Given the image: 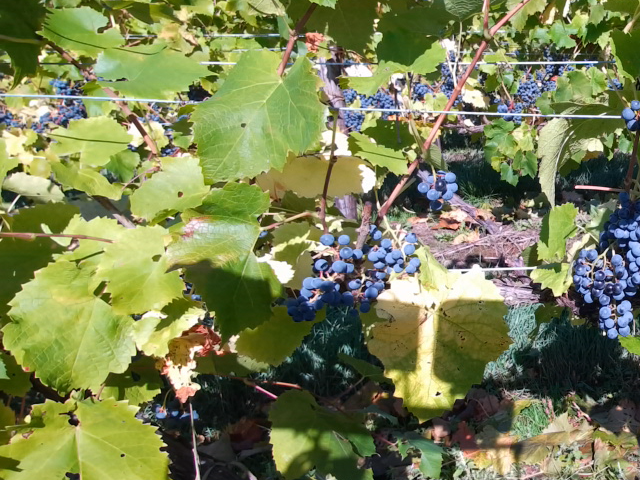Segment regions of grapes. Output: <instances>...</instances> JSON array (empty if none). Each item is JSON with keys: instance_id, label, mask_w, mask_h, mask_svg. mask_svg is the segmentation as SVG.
<instances>
[{"instance_id": "obj_1", "label": "grapes", "mask_w": 640, "mask_h": 480, "mask_svg": "<svg viewBox=\"0 0 640 480\" xmlns=\"http://www.w3.org/2000/svg\"><path fill=\"white\" fill-rule=\"evenodd\" d=\"M620 208L610 215V220L604 224V231L599 234V246L606 249L609 238H616L619 247L631 249L626 258L631 261L629 269L623 267V257L615 254L611 258L614 271L610 267L598 270L592 279L588 276L591 265L598 258L595 249L582 250L575 260V274L572 276L575 290L584 296L587 304L602 305L599 308V327L607 330L611 339L619 335L626 336L630 332L633 314L630 312L632 303L624 300L626 296H633L636 288H640V201L631 203L626 191L618 194Z\"/></svg>"}, {"instance_id": "obj_2", "label": "grapes", "mask_w": 640, "mask_h": 480, "mask_svg": "<svg viewBox=\"0 0 640 480\" xmlns=\"http://www.w3.org/2000/svg\"><path fill=\"white\" fill-rule=\"evenodd\" d=\"M369 235L372 236L374 242H380V249L373 248L372 245L365 244L362 249H354L352 247H343L339 251L342 259L360 260L367 257L368 262L378 269L372 272V279L365 281L364 295L360 297V305L358 310L361 313H369L371 311V303L376 302L381 291L384 290L385 279L392 272L401 273L405 262L403 261L402 252L399 249H392V241L390 238L382 239V231L377 229L374 223L370 224Z\"/></svg>"}, {"instance_id": "obj_3", "label": "grapes", "mask_w": 640, "mask_h": 480, "mask_svg": "<svg viewBox=\"0 0 640 480\" xmlns=\"http://www.w3.org/2000/svg\"><path fill=\"white\" fill-rule=\"evenodd\" d=\"M313 289H322L326 294L317 296L316 300L309 303V298L313 297V292L310 290ZM339 289V283L323 280L320 277H307L302 282L300 296L297 299H286L284 306L287 307L288 315L292 316L294 322H303L304 320L311 322L316 317L317 311L322 309L325 304L340 306L342 303L345 305H353L355 303V298L351 291L339 293Z\"/></svg>"}, {"instance_id": "obj_4", "label": "grapes", "mask_w": 640, "mask_h": 480, "mask_svg": "<svg viewBox=\"0 0 640 480\" xmlns=\"http://www.w3.org/2000/svg\"><path fill=\"white\" fill-rule=\"evenodd\" d=\"M418 175L423 179L416 185V190L429 200V208L434 211H440L443 208L442 202L437 199L442 197L445 201L452 200L454 193L458 192V183L455 182L457 175L454 172L438 170L435 188H430L434 183V177L427 170L419 171Z\"/></svg>"}, {"instance_id": "obj_5", "label": "grapes", "mask_w": 640, "mask_h": 480, "mask_svg": "<svg viewBox=\"0 0 640 480\" xmlns=\"http://www.w3.org/2000/svg\"><path fill=\"white\" fill-rule=\"evenodd\" d=\"M313 268L319 272L329 273H352L354 271V264L351 262L345 263L343 260H335L329 268V262L325 258H319L313 264Z\"/></svg>"}, {"instance_id": "obj_6", "label": "grapes", "mask_w": 640, "mask_h": 480, "mask_svg": "<svg viewBox=\"0 0 640 480\" xmlns=\"http://www.w3.org/2000/svg\"><path fill=\"white\" fill-rule=\"evenodd\" d=\"M640 109L639 100H631L630 107H626L621 111V118L627 121V127L631 131H637L639 129V123L635 120L637 114L635 111Z\"/></svg>"}, {"instance_id": "obj_7", "label": "grapes", "mask_w": 640, "mask_h": 480, "mask_svg": "<svg viewBox=\"0 0 640 480\" xmlns=\"http://www.w3.org/2000/svg\"><path fill=\"white\" fill-rule=\"evenodd\" d=\"M404 241L407 243L403 248V252L407 256H411L416 251V245L414 244L417 241L416 235L413 233H408L404 236Z\"/></svg>"}, {"instance_id": "obj_8", "label": "grapes", "mask_w": 640, "mask_h": 480, "mask_svg": "<svg viewBox=\"0 0 640 480\" xmlns=\"http://www.w3.org/2000/svg\"><path fill=\"white\" fill-rule=\"evenodd\" d=\"M421 266V261L417 257H413L409 260V265L405 267V274L414 276L417 272V268Z\"/></svg>"}]
</instances>
